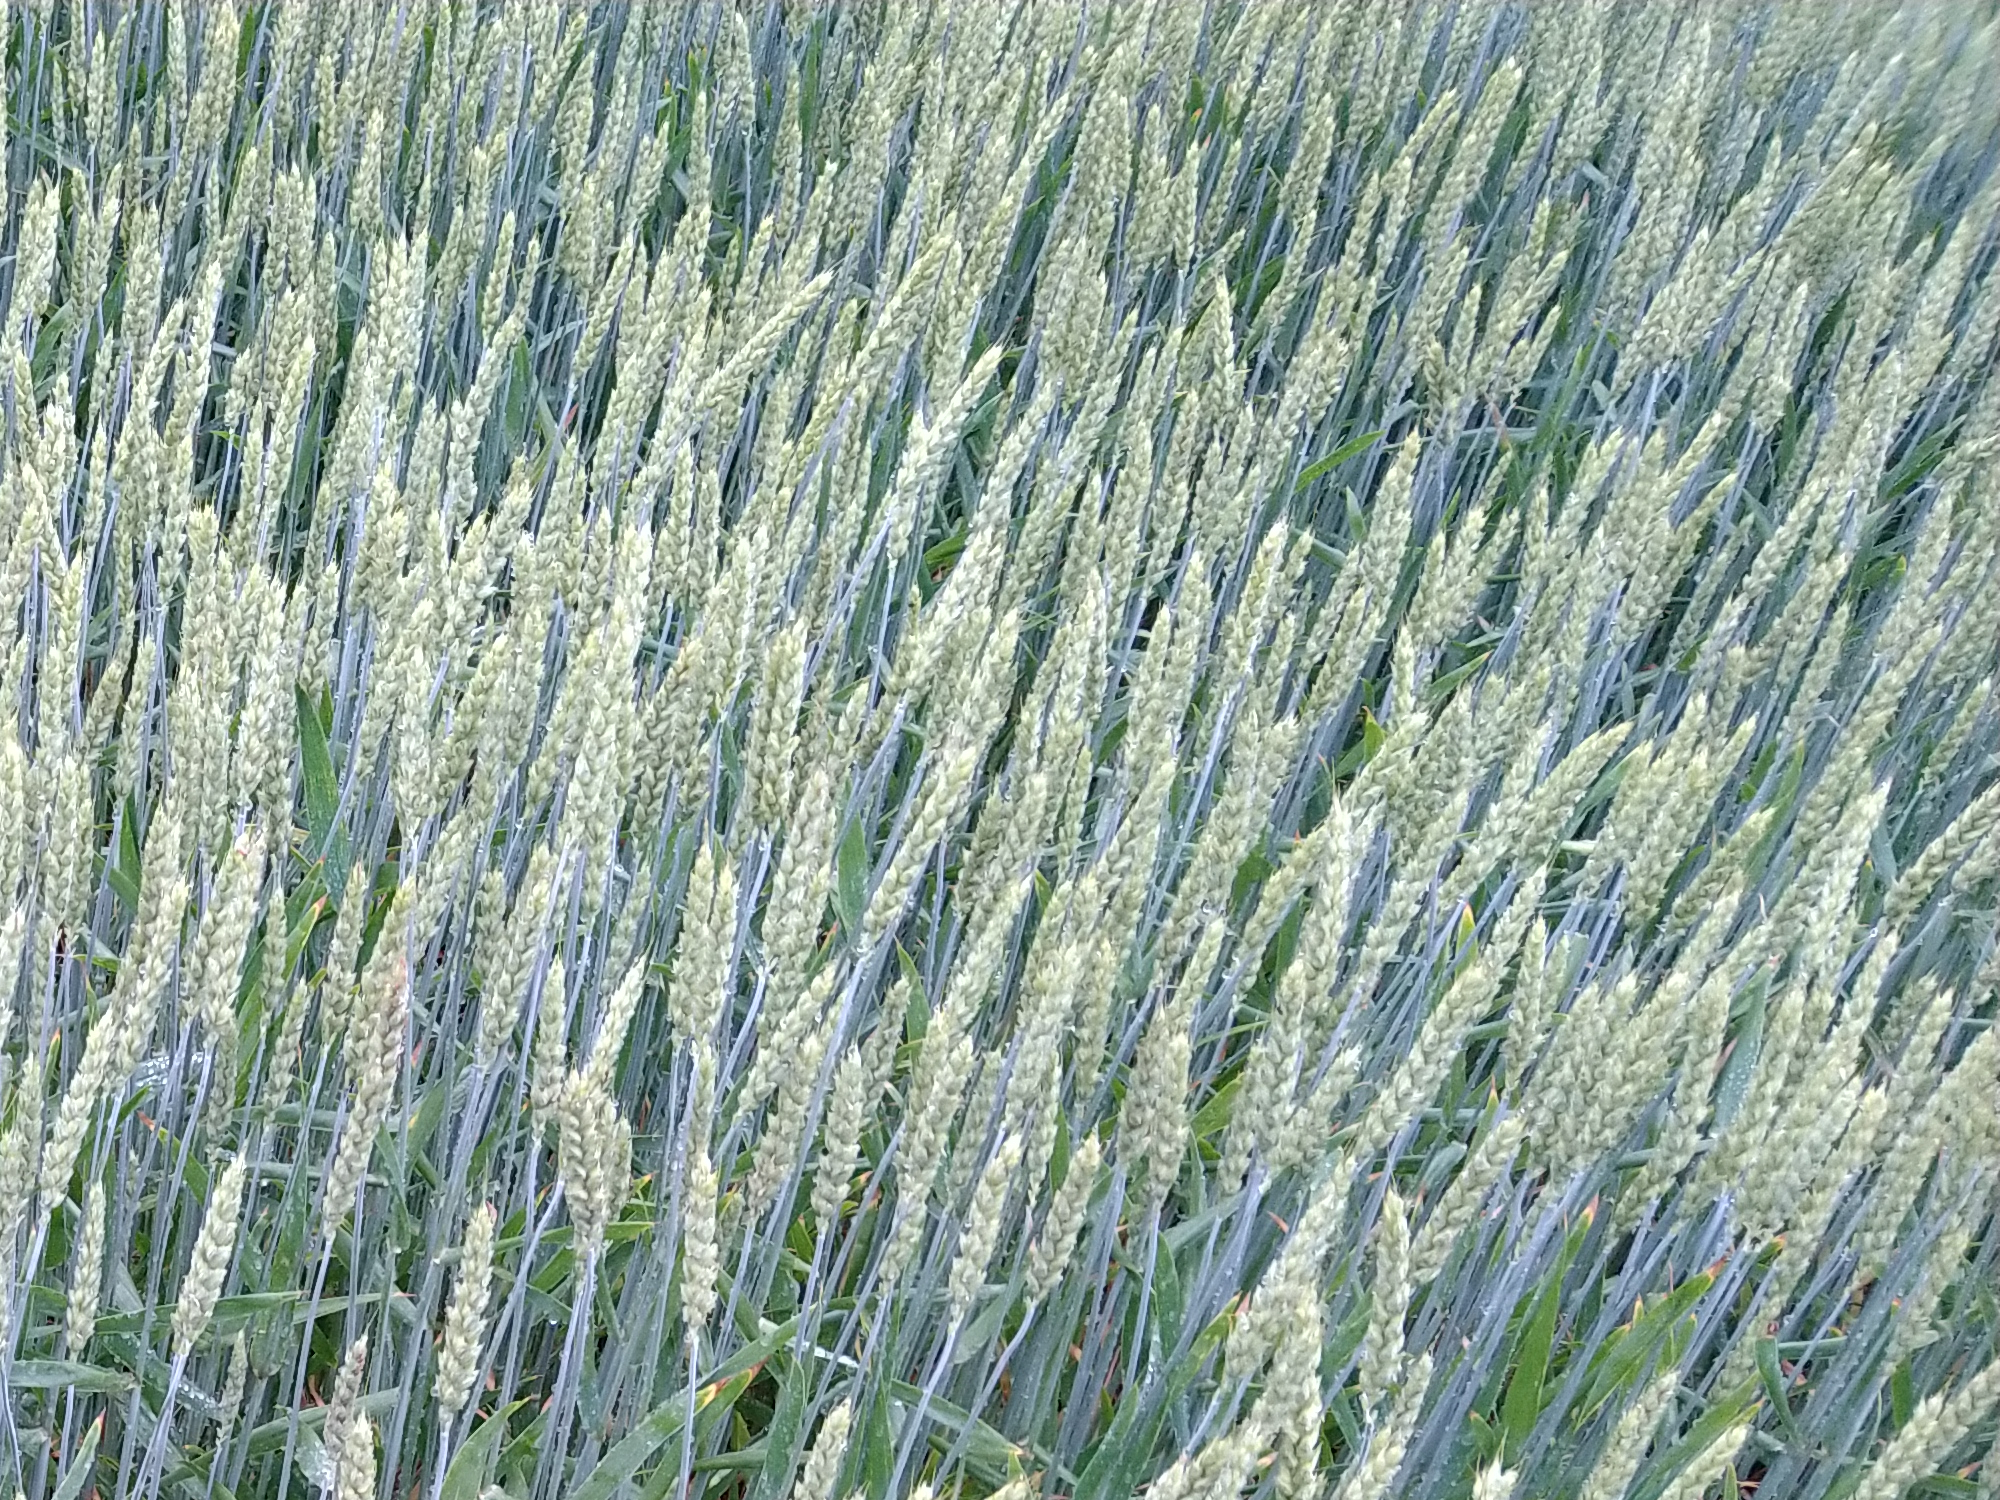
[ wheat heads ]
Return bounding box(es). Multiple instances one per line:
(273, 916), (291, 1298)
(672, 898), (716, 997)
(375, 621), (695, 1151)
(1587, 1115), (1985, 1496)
(1028, 50), (1055, 135)
(1209, 717), (1258, 907)
(1042, 241), (1088, 388)
(893, 1009), (952, 1169)
(671, 850), (715, 1039)
(942, 0), (966, 70)
(1378, 92), (1456, 187)
(1110, 422), (1152, 563)
(1150, 1038), (1198, 1230)
(1096, 871), (1138, 942)
(707, 278), (833, 387)
(944, 77), (1005, 196)
(1065, 261), (1099, 359)
(226, 149), (256, 261)
(398, 5), (426, 94)
(722, 60), (742, 121)
(931, 1477), (1040, 1500)
(0, 642), (32, 736)
(1216, 525), (1288, 676)
(1890, 217), (1970, 365)
(1531, 23), (1564, 94)
(1415, 248), (1470, 350)
(762, 625), (806, 816)
(1086, 94), (1122, 199)
(1699, 1301), (1784, 1426)
(1314, 809), (1353, 1006)
(1227, 830), (1329, 998)
(1550, 66), (1601, 170)
(199, 841), (266, 1028)
(194, 260), (220, 369)
(1951, 626), (2000, 686)
(1192, 695), (1230, 782)
(1071, 937), (1116, 1118)
(1261, 348), (1323, 483)
(668, 213), (690, 289)
(652, 449), (700, 580)
(1772, 413), (1812, 516)
(784, 369), (853, 481)
(560, 642), (631, 830)
(1550, 13), (1591, 88)
(292, 0), (317, 81)
(155, 101), (166, 155)
(1145, 198), (1173, 257)
(769, 79), (799, 170)
(1481, 254), (1527, 345)
(16, 178), (43, 293)
(34, 644), (66, 760)
(763, 374), (791, 492)
(454, 0), (480, 87)
(1057, 473), (1105, 625)
(199, 2), (234, 146)
(377, 956), (413, 1104)
(792, 237), (818, 295)
(1606, 747), (1653, 828)
(678, 1157), (719, 1336)
(0, 114), (7, 226)
(447, 400), (470, 521)
(21, 760), (47, 873)
(1699, 252), (1762, 330)
(1950, 65), (1985, 133)
(1145, 555), (1201, 780)
(1877, 238), (1933, 338)
(1890, 569), (1935, 659)
(618, 521), (653, 651)
(1352, 802), (1381, 875)
(910, 1034), (974, 1193)
(869, 354), (907, 429)
(1217, 230), (1245, 261)
(489, 9), (525, 138)
(1477, 320), (1514, 392)
(851, 436), (871, 526)
(441, 484), (532, 649)
(1930, 564), (1976, 610)
(437, 1202), (497, 1422)
(830, 231), (868, 318)
(24, 469), (64, 599)
(423, 810), (473, 931)
(165, 107), (202, 230)
(466, 322), (516, 447)
(1616, 435), (1665, 573)
(298, 176), (318, 242)
(795, 166), (835, 243)
(1876, 783), (2000, 911)
(1887, 334), (1953, 438)
(1373, 159), (1415, 269)
(364, 9), (398, 107)
(1525, 0), (1552, 48)
(1752, 836), (1839, 976)
(1605, 133), (1631, 183)
(404, 398), (436, 493)
(986, 0), (1016, 57)
(863, 754), (980, 947)
(1504, 265), (1539, 314)
(1967, 466), (2000, 515)
(944, 611), (1023, 759)
(1060, 163), (1088, 238)
(955, 775), (1051, 973)
(0, 519), (33, 640)
(1281, 1361), (1314, 1500)
(903, 504), (1002, 709)
(238, 573), (271, 666)
(1093, 4), (1105, 42)
(575, 758), (619, 920)
(50, 374), (79, 475)
(1030, 235), (1067, 331)
(625, 134), (654, 210)
(801, 660), (836, 761)
(267, 339), (316, 525)
(987, 158), (1030, 284)
(161, 438), (195, 591)
(284, 170), (304, 284)
(1143, 32), (1179, 94)
(259, 887), (286, 1011)
(467, 23), (492, 76)
(1787, 317), (1813, 382)
(1005, 692), (1042, 794)
(1306, 591), (1367, 707)
(487, 213), (515, 330)
(1358, 974), (1482, 1173)
(1618, 3), (1675, 118)
(131, 295), (185, 425)
(381, 237), (419, 354)
(1911, 1361), (2000, 1482)
(781, 1403), (854, 1500)
(930, 286), (984, 409)
(1266, 531), (1309, 625)
(261, 986), (315, 1105)
(710, 323), (722, 383)
(1211, 271), (1235, 408)
(1641, 18), (1694, 123)
(83, 29), (106, 140)
(476, 872), (506, 988)
(1246, 289), (1277, 345)
(329, 0), (349, 68)
(216, 562), (237, 650)
(114, 810), (171, 997)
(1810, 424), (1870, 558)
(1922, 1113), (1971, 1226)
(774, 133), (802, 254)
(593, 359), (641, 483)
(522, 7), (547, 57)
(1178, 293), (1238, 383)
(840, 81), (878, 143)
(989, 386), (1056, 492)
(1331, 717), (1433, 828)
(1615, 1428), (1751, 1500)
(1219, 0), (1260, 76)
(253, 302), (276, 378)
(80, 615), (146, 752)
(1861, 364), (1898, 418)
(1665, 551), (1724, 662)
(106, 533), (132, 632)
(646, 249), (671, 341)
(321, 1073), (381, 1238)
(42, 1011), (119, 1199)
(1396, 975), (1492, 1126)
(0, 265), (39, 375)
(956, 198), (1012, 296)
(1062, 314), (1140, 462)
(1799, 57), (1862, 154)
(1812, 1386), (1938, 1500)
(1675, 165), (1705, 250)
(270, 3), (304, 76)
(611, 262), (645, 377)
(1085, 211), (1118, 267)
(579, 233), (635, 371)
(642, 269), (704, 392)
(1429, 340), (1450, 427)
(669, 636), (709, 764)
(1483, 455), (1510, 513)
(1928, 439), (1993, 478)
(397, 652), (431, 825)
(121, 883), (189, 1056)
(33, 192), (59, 315)
(1670, 420), (1724, 495)
(1060, 0), (1082, 55)
(22, 921), (58, 1058)
(492, 862), (558, 1034)
(1719, 518), (1752, 560)
(798, 805), (839, 961)
(1386, 333), (1428, 408)
(586, 966), (646, 1095)
(1829, 273), (1889, 390)
(306, 563), (339, 686)
(1745, 137), (1783, 242)
(949, 53), (978, 108)
(1149, 0), (1167, 48)
(827, 161), (856, 236)
(1809, 397), (1861, 480)
(1642, 152), (1695, 265)
(1359, 277), (1378, 348)
(366, 117), (384, 208)
(1136, 1443), (1233, 1500)
(1306, 338), (1348, 414)
(558, 105), (587, 203)
(1791, 785), (1889, 980)
(841, 501), (900, 622)
(61, 559), (86, 736)
(368, 242), (388, 343)
(379, 370), (397, 418)
(1694, 645), (1743, 759)
(691, 3), (713, 50)
(1363, 491), (1384, 566)
(274, 74), (290, 140)
(734, 687), (776, 850)
(1384, 786), (1454, 865)
(80, 425), (109, 546)
(1226, 1179), (1353, 1371)
(1520, 985), (1601, 1123)
(1401, 8), (1438, 94)
(1593, 759), (1675, 887)
(548, 79), (571, 138)
(324, 1420), (373, 1500)
(632, 126), (669, 214)
(379, 409), (404, 478)
(841, 88), (872, 146)
(956, 1053), (1011, 1191)
(1105, 535), (1140, 639)
(1025, 0), (1055, 55)
(1882, 139), (1953, 220)
(1452, 513), (1520, 633)
(965, 0), (999, 63)
(491, 140), (509, 221)
(1476, 720), (1563, 865)
(1046, 736), (1087, 833)
(564, 1074), (601, 1266)
(1203, 495), (1244, 565)
(1767, 1076), (1856, 1236)
(254, 126), (272, 214)
(1534, 726), (1630, 850)
(533, 7), (558, 91)
(687, 92), (706, 174)
(972, 70), (1025, 182)
(1427, 508), (1485, 645)
(170, 1153), (254, 1358)
(1631, 0), (1674, 102)
(1345, 32), (1376, 142)
(1609, 282), (1674, 393)
(1019, 886), (1075, 1014)
(300, 482), (326, 581)
(1334, 1), (1379, 85)
(1850, 1094), (1933, 1254)
(349, 478), (400, 608)
(665, 332), (706, 433)
(1661, 694), (1710, 772)
(1301, 267), (1334, 355)
(1106, 838), (1158, 948)
(949, 1139), (1026, 1322)
(331, 404), (369, 505)
(1674, 26), (1709, 143)
(466, 154), (497, 272)
(70, 1185), (105, 1350)
(14, 1054), (47, 1198)
(1963, 1165), (1997, 1228)
(1085, 0), (1145, 106)
(1726, 194), (1750, 230)
(0, 753), (22, 927)
(1082, 557), (1109, 716)
(613, 384), (650, 484)
(552, 58), (595, 151)
(1392, 539), (1447, 657)
(1634, 535), (1701, 639)
(1299, 1362), (1433, 1500)
(529, 632), (600, 804)
(604, 1119), (634, 1215)
(8, 353), (47, 471)
(1258, 962), (1311, 1164)
(98, 88), (121, 169)
(1715, 118), (1760, 202)
(1400, 239), (1460, 343)
(1149, 393), (1201, 529)
(887, 173), (922, 284)
(910, 4), (930, 39)
(1264, 29), (1306, 125)
(0, 1129), (20, 1243)
(106, 17), (130, 88)
(596, 84), (628, 166)
(1230, 0), (1280, 105)
(1091, 1454), (1193, 1500)
(1348, 845), (1450, 999)
(647, 0), (668, 53)
(1513, 305), (1561, 383)
(1470, 680), (1509, 726)
(1384, 429), (1422, 576)
(719, 235), (741, 298)
(831, 506), (856, 581)
(968, 65), (990, 102)
(1837, 168), (1890, 224)
(1276, 221), (1316, 322)
(1921, 685), (1988, 779)
(1871, 61), (1939, 154)
(1382, 473), (1413, 610)
(858, 0), (879, 36)
(440, 204), (460, 268)
(1292, 121), (1337, 212)
(279, 590), (305, 705)
(886, 1190), (927, 1282)
(1854, 1138), (1932, 1286)
(1680, 901), (1736, 988)
(1675, 231), (1708, 282)
(895, 0), (917, 48)
(349, 607), (428, 762)
(702, 385), (726, 469)
(974, 390), (1009, 488)
(1492, 665), (1554, 769)
(1461, 72), (1500, 141)
(1057, 745), (1096, 868)
(1679, 992), (1726, 1126)
(89, 328), (115, 431)
(753, 990), (851, 1200)
(1765, 1094), (1884, 1299)
(0, 484), (14, 592)
(1727, 259), (1776, 344)
(373, 514), (411, 638)
(481, 840), (548, 1043)
(341, 873), (421, 1052)
(816, 301), (861, 402)
(182, 511), (245, 695)
(1767, 161), (1800, 206)
(432, 256), (476, 349)
(139, 428), (156, 561)
(265, 288), (296, 399)
(115, 637), (160, 812)
(813, 1044), (864, 1225)
(613, 694), (635, 818)
(672, 158), (713, 252)
(1429, 36), (1464, 107)
(762, 244), (803, 316)
(752, 267), (777, 322)
(1199, 27), (1230, 98)
(117, 249), (165, 388)
(1027, 95), (1069, 183)
(1419, 862), (1493, 943)
(471, 676), (503, 822)
(288, 274), (315, 359)
(1881, 199), (1913, 257)
(871, 70), (916, 142)
(1830, 675), (1906, 754)
(41, 0), (52, 24)
(1921, 581), (2000, 681)
(502, 615), (543, 770)
(797, 569), (819, 614)
(1842, 214), (1887, 316)
(1127, 609), (1172, 781)
(1203, 140), (1243, 235)
(1238, 1293), (1328, 1441)
(692, 205), (713, 267)
(1827, 64), (1899, 152)
(725, 217), (774, 313)
(263, 180), (289, 289)
(860, 983), (911, 1123)
(1900, 625), (1941, 687)
(481, 20), (506, 87)
(1877, 1229), (1963, 1373)
(743, 965), (836, 1139)
(1953, 1087), (2000, 1203)
(1940, 212), (1996, 325)
(435, 641), (502, 798)
(191, 832), (252, 976)
(759, 948), (807, 1047)
(963, 145), (1015, 238)
(529, 15), (588, 115)
(1233, 473), (1262, 575)
(1629, 474), (1674, 570)
(1940, 375), (1996, 498)
(168, 1), (185, 118)
(1009, 3), (1033, 61)
(412, 418), (444, 561)
(692, 292), (708, 335)
(231, 406), (262, 556)
(320, 865), (362, 1038)
(764, 767), (824, 962)
(1714, 253), (1786, 412)
(717, 540), (756, 701)
(406, 109), (432, 189)
(1782, 604), (1847, 741)
(1332, 283), (1356, 329)
(915, 179), (944, 256)
(1251, 619), (1292, 744)
(1375, 318), (1399, 374)
(1122, 190), (1152, 249)
(70, 1), (86, 107)
(1140, 483), (1189, 580)
(1651, 277), (1684, 369)
(862, 689), (898, 764)
(950, 885), (1029, 1017)
(122, 125), (142, 246)
(1550, 652), (1586, 724)
(1489, 871), (1545, 977)
(1341, 173), (1380, 274)
(1318, 616), (1386, 722)
(1806, 313), (1847, 384)
(1372, 20), (1403, 119)
(146, 200), (158, 241)
(1533, 1024), (1613, 1153)
(194, 700), (228, 830)
(1062, 273), (1110, 399)
(1415, 1129), (1522, 1285)
(811, 58), (855, 140)
(1515, 732), (1606, 833)
(210, 42), (239, 138)
(1639, 34), (1704, 183)
(111, 421), (142, 533)
(510, 532), (540, 629)
(1555, 434), (1629, 541)
(454, 518), (485, 573)
(1207, 0), (1231, 38)
(1792, 721), (1884, 838)
(1592, 46), (1644, 137)
(1298, 580), (1314, 638)
(218, 1331), (249, 1444)
(325, 327), (365, 468)
(316, 58), (337, 151)
(1559, 974), (1641, 1156)
(934, 57), (964, 132)
(70, 766), (92, 919)
(167, 685), (199, 853)
(312, 0), (333, 62)
(1030, 1129), (1103, 1304)
(1466, 88), (1515, 191)
(1946, 826), (2000, 891)
(352, 138), (370, 223)
(839, 681), (871, 751)
(1074, 47), (1126, 168)
(1684, 477), (1735, 538)
(92, 163), (122, 300)
(573, 507), (610, 657)
(62, 212), (91, 369)
(593, 202), (615, 287)
(1116, 1010), (1170, 1158)
(1133, 105), (1161, 193)
(672, 0), (686, 47)
(734, 19), (754, 119)
(1307, 548), (1359, 656)
(737, 447), (793, 531)
(368, 357), (386, 437)
(1754, 287), (1808, 407)
(752, 391), (776, 489)
(544, 437), (586, 611)
(1757, 1038), (1862, 1190)
(453, 92), (488, 156)
(1882, 973), (1933, 1057)
(317, 246), (335, 345)
(796, 208), (826, 269)
(379, 102), (401, 182)
(1503, 82), (1575, 187)
(1202, 440), (1221, 528)
(1542, 1372), (1676, 1500)
(1449, 288), (1482, 374)
(68, 167), (99, 219)
(205, 1023), (239, 1169)
(1282, 94), (1334, 196)
(1610, 186), (1660, 304)
(1391, 628), (1415, 712)
(997, 476), (1068, 613)
(1126, 29), (1145, 76)
(331, 20), (367, 151)
(876, 0), (895, 57)
(679, 743), (706, 830)
(265, 702), (290, 845)
(1005, 947), (1088, 1109)
(1807, 919), (1852, 1040)
(914, 11), (943, 58)
(228, 350), (255, 426)
(1615, 0), (1664, 78)
(1951, 1033), (1997, 1103)
(517, 244), (540, 329)
(610, 60), (641, 171)
(166, 364), (211, 461)
(1108, 6), (1123, 45)
(1665, 815), (1774, 936)
(629, 711), (676, 848)
(1363, 1190), (1409, 1401)
(1786, 220), (1846, 291)
(818, 541), (834, 619)
(54, 62), (65, 143)
(1770, 161), (1844, 252)
(0, 910), (18, 1109)
(1958, 475), (2000, 563)
(1861, 368), (1901, 503)
(889, 410), (927, 553)
(31, 404), (64, 495)
(1744, 20), (1802, 103)
(1251, 724), (1299, 845)
(385, 563), (429, 656)
(1413, 112), (1461, 201)
(1241, 42), (1281, 129)
(1413, 651), (1433, 710)
(531, 959), (566, 1143)
(619, 6), (648, 66)
(717, 0), (737, 63)
(753, 489), (792, 605)
(1327, 0), (1358, 68)
(431, 104), (450, 189)
(1896, 994), (1953, 1100)
(1071, 766), (1176, 911)
(427, 3), (450, 104)
(1593, 979), (1679, 1149)
(1515, 251), (1572, 328)
(1691, 1080), (1755, 1208)
(1744, 997), (1801, 1151)
(1035, 630), (1066, 700)
(631, 390), (693, 500)
(1570, 43), (1602, 103)
(1524, 474), (1549, 568)
(1619, 523), (1669, 640)
(42, 766), (82, 929)
(641, 653), (681, 733)
(671, 1043), (714, 1175)
(978, 529), (1012, 606)
(829, 371), (866, 516)
(1302, 46), (1329, 123)
(922, 442), (949, 517)
(455, 81), (474, 128)
(907, 72), (940, 172)
(1205, 619), (1238, 709)
(702, 873), (741, 1036)
(1426, 1465), (1513, 1500)
(1615, 751), (1708, 903)
(1681, 220), (1737, 325)
(1218, 1044), (1267, 1188)
(327, 1331), (367, 1447)
(853, 139), (887, 226)
(1150, 833), (1215, 962)
(1439, 695), (1469, 800)
(788, 301), (829, 410)
(1841, 937), (1896, 1049)
(1698, 73), (1736, 166)
(1482, 689), (1527, 772)
(920, 605), (985, 746)
(206, 160), (221, 240)
(931, 351), (1006, 442)
(898, 245), (954, 354)
(1696, 108), (1751, 203)
(686, 473), (721, 601)
(1136, 150), (1170, 240)
(1723, 925), (1772, 982)
(1505, 580), (1567, 675)
(1382, 694), (1468, 856)
(721, 310), (749, 437)
(1897, 496), (1948, 596)
(789, 467), (823, 567)
(1310, 0), (1333, 35)
(1527, 554), (1583, 662)
(856, 258), (926, 372)
(611, 867), (653, 988)
(1176, 147), (1199, 262)
(1744, 480), (1826, 589)
(1126, 0), (1156, 63)
(1603, 438), (1640, 543)
(1230, 408), (1257, 488)
(567, 182), (605, 273)
(235, 589), (291, 794)
(1523, 198), (1550, 263)
(1781, 561), (1844, 685)
(1134, 8), (1181, 81)
(1111, 101), (1132, 199)
(1614, 1116), (1699, 1226)
(1955, 254), (2000, 371)
(1739, 570), (1820, 681)
(1497, 1), (1521, 42)
(1283, 1045), (1361, 1159)
(1562, 524), (1614, 677)
(1166, 20), (1200, 120)
(1178, 922), (1223, 1018)
(1045, 633), (1095, 761)
(388, 372), (416, 480)
(1542, 934), (1573, 1020)
(1499, 926), (1552, 1066)
(897, 589), (922, 684)
(958, 782), (1014, 911)
(920, 246), (966, 370)
(1420, 136), (1481, 235)
(406, 229), (431, 365)
(1118, 343), (1161, 452)
(1666, 717), (1755, 876)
